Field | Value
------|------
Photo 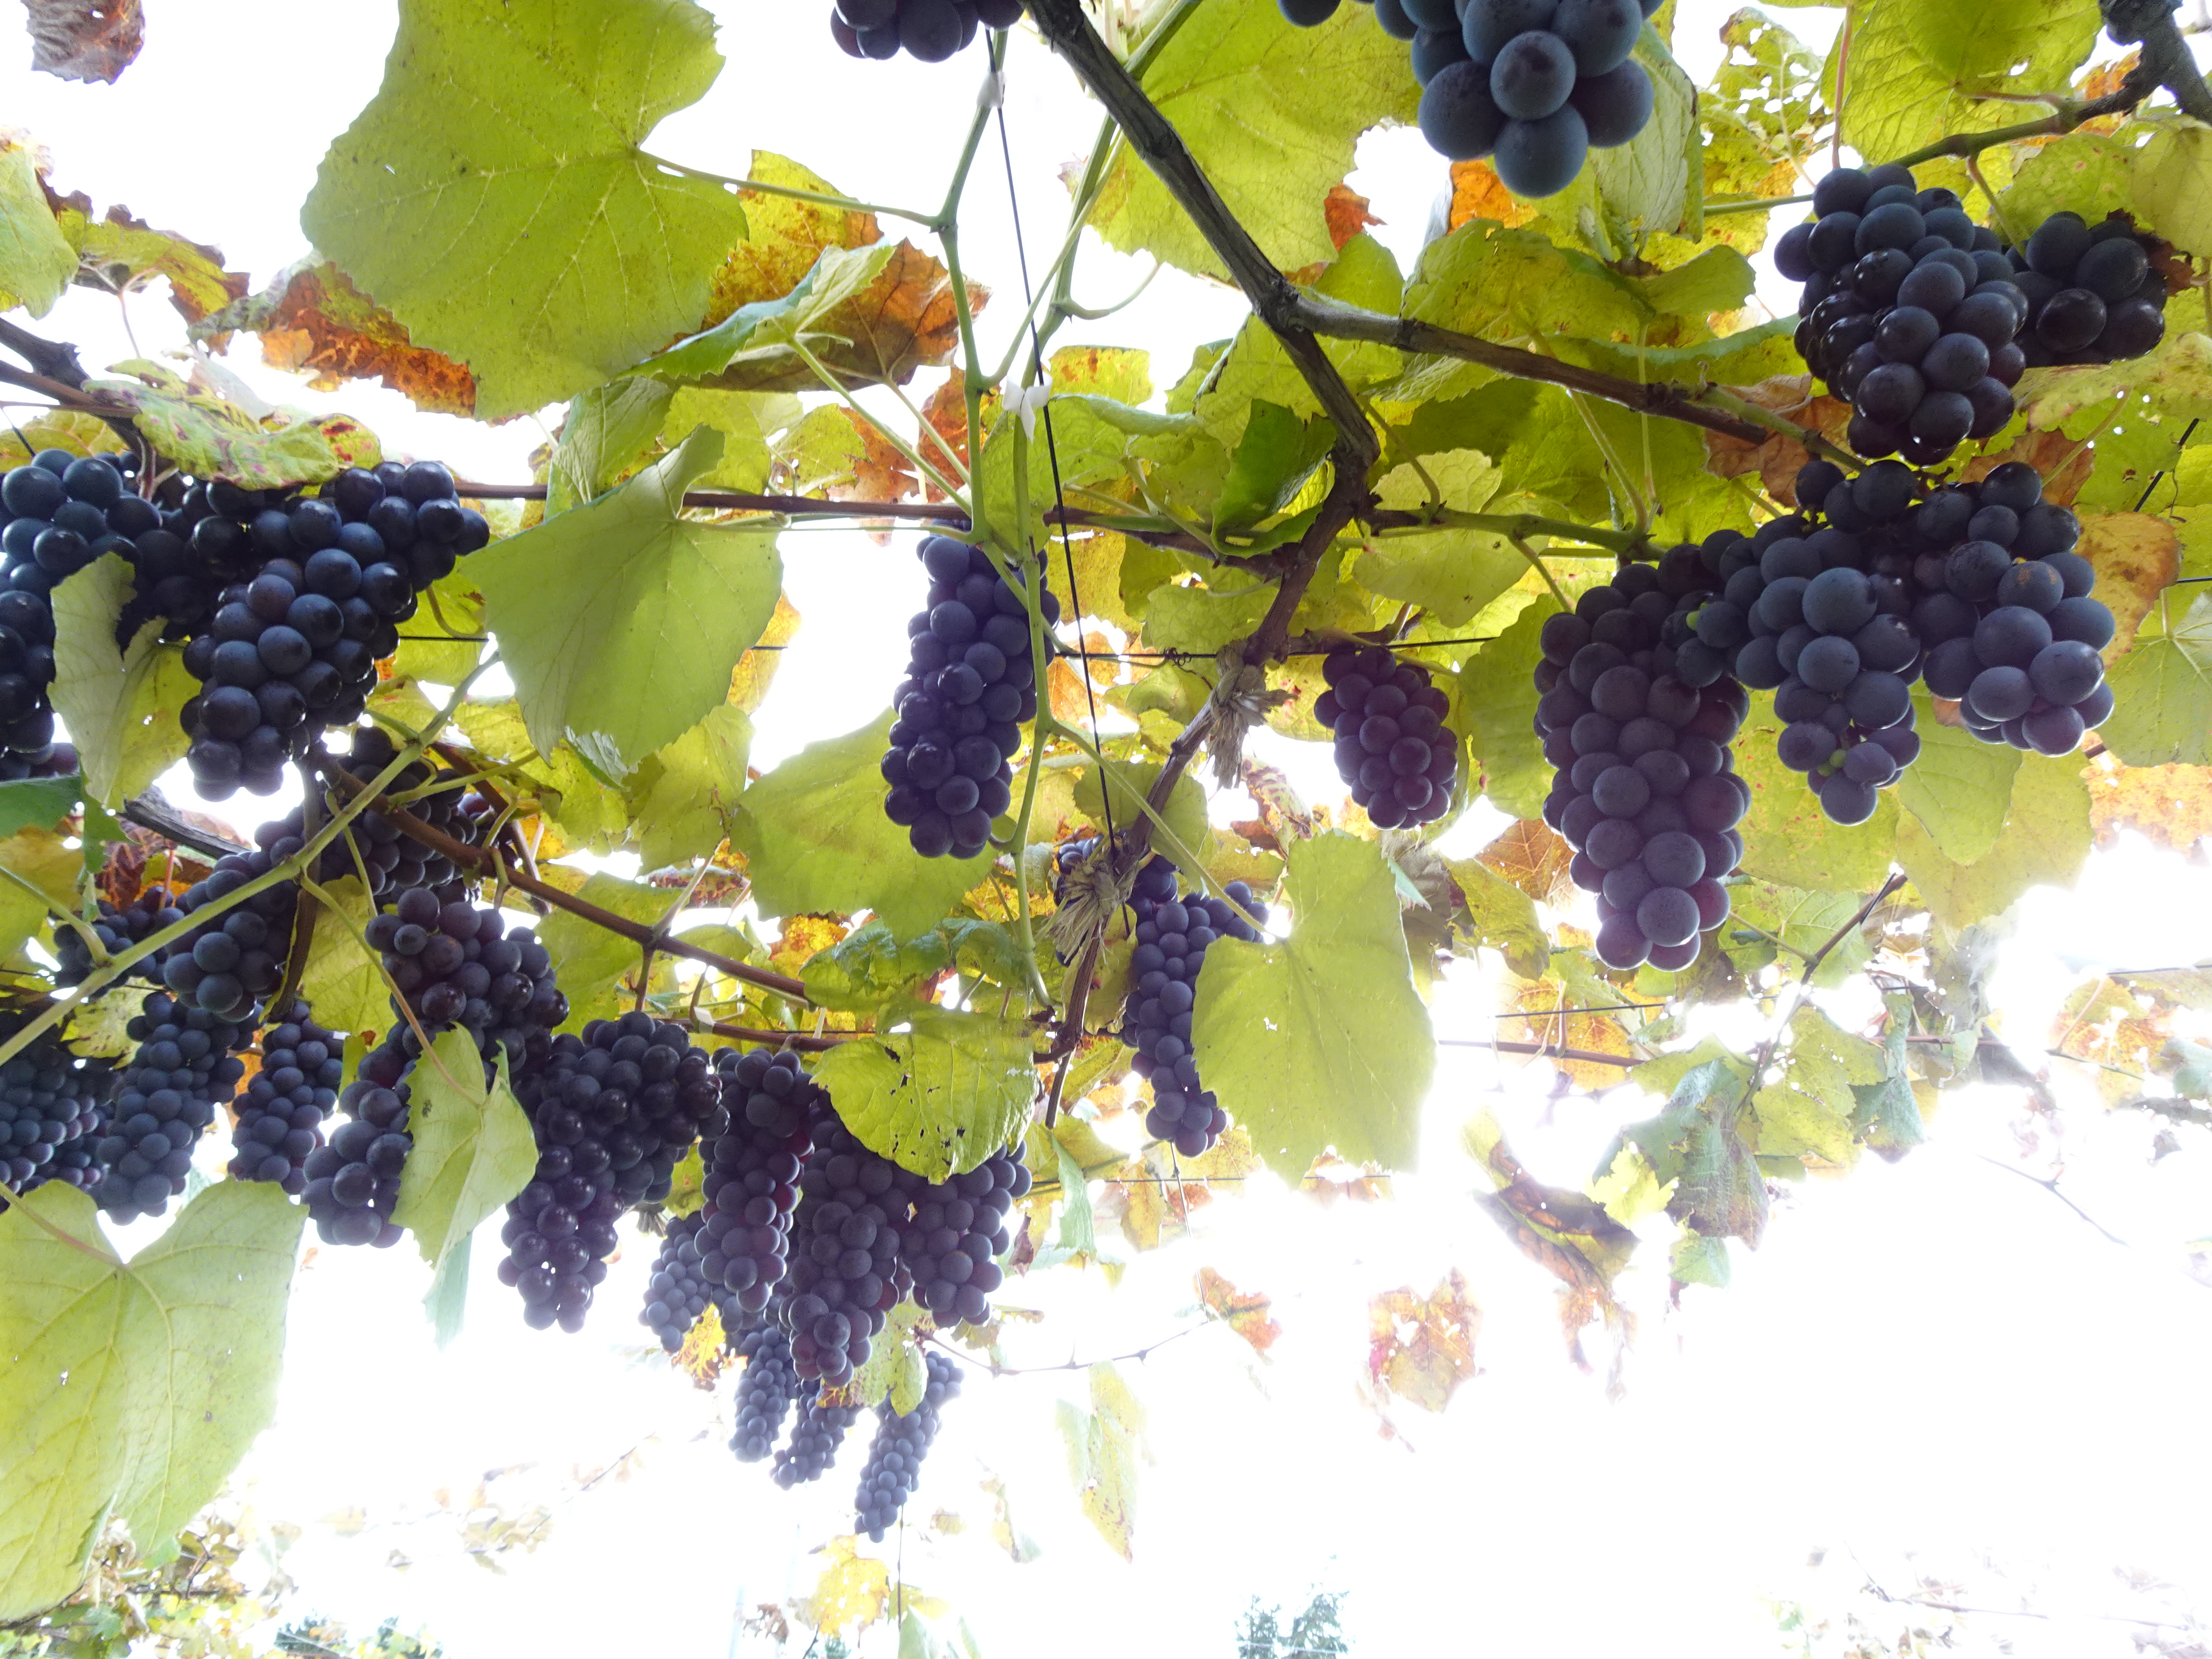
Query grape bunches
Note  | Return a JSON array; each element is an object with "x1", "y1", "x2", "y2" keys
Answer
[
  {"x1": 1, "y1": 977, "x2": 103, "y2": 1219},
  {"x1": 0, "y1": 569, "x2": 86, "y2": 794},
  {"x1": 1531, "y1": 560, "x2": 1755, "y2": 973},
  {"x1": 1274, "y1": 2, "x2": 1671, "y2": 199},
  {"x1": 229, "y1": 980, "x2": 351, "y2": 1207},
  {"x1": 168, "y1": 729, "x2": 470, "y2": 1029},
  {"x1": 1, "y1": 440, "x2": 195, "y2": 754},
  {"x1": 638, "y1": 1189, "x2": 714, "y2": 1363},
  {"x1": 694, "y1": 1011, "x2": 827, "y2": 1316},
  {"x1": 306, "y1": 1029, "x2": 417, "y2": 1251},
  {"x1": 1760, "y1": 158, "x2": 2026, "y2": 474},
  {"x1": 1664, "y1": 524, "x2": 1929, "y2": 829},
  {"x1": 773, "y1": 1382, "x2": 865, "y2": 1499},
  {"x1": 879, "y1": 519, "x2": 1066, "y2": 860},
  {"x1": 841, "y1": 1352, "x2": 968, "y2": 1555},
  {"x1": 445, "y1": 803, "x2": 530, "y2": 877},
  {"x1": 904, "y1": 1133, "x2": 1046, "y2": 1341},
  {"x1": 1312, "y1": 636, "x2": 1470, "y2": 831},
  {"x1": 725, "y1": 1307, "x2": 800, "y2": 1461},
  {"x1": 362, "y1": 883, "x2": 572, "y2": 1066},
  {"x1": 2001, "y1": 208, "x2": 2179, "y2": 372},
  {"x1": 101, "y1": 995, "x2": 243, "y2": 1241},
  {"x1": 1123, "y1": 856, "x2": 1264, "y2": 1162},
  {"x1": 486, "y1": 1011, "x2": 734, "y2": 1341},
  {"x1": 789, "y1": 1115, "x2": 904, "y2": 1395},
  {"x1": 180, "y1": 456, "x2": 487, "y2": 794},
  {"x1": 55, "y1": 891, "x2": 186, "y2": 1009},
  {"x1": 1796, "y1": 458, "x2": 2123, "y2": 756},
  {"x1": 823, "y1": 0, "x2": 1033, "y2": 66}
]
